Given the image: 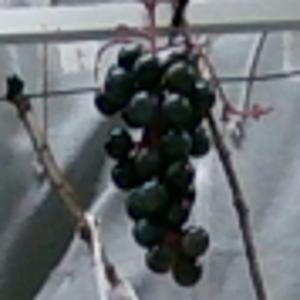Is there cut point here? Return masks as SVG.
<instances>
[{
    "label": "cut point",
    "mask_w": 300,
    "mask_h": 300,
    "mask_svg": "<svg viewBox=\"0 0 300 300\" xmlns=\"http://www.w3.org/2000/svg\"><path fill=\"white\" fill-rule=\"evenodd\" d=\"M158 0H145L144 9L148 12L151 27V56L157 57L156 50V10Z\"/></svg>",
    "instance_id": "obj_1"
}]
</instances>
